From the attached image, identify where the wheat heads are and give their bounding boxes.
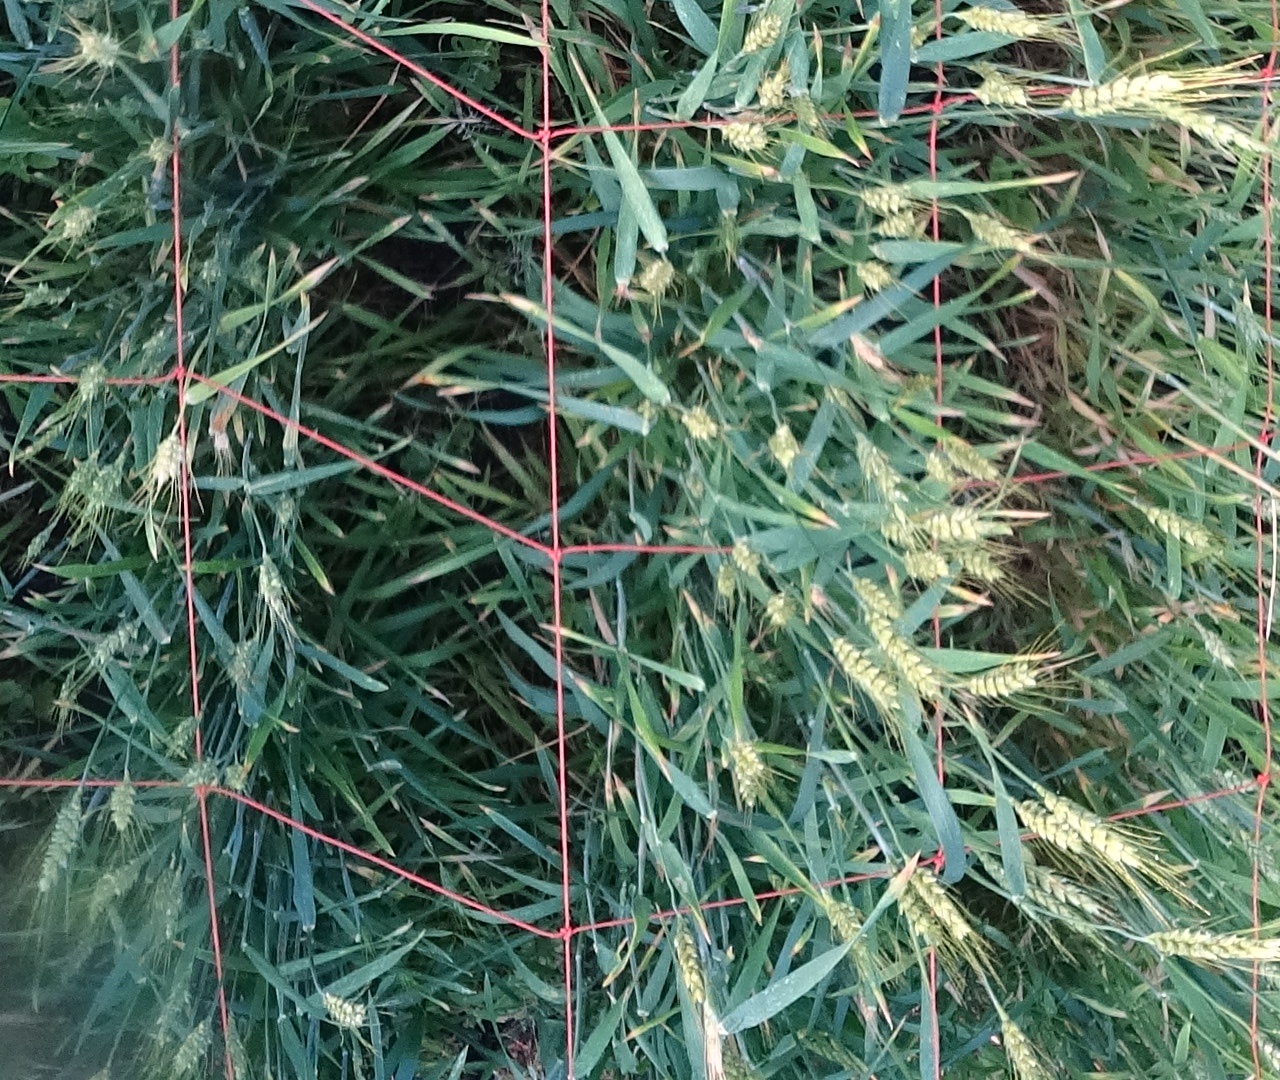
[997,1017,1042,1080]
[978,854,1076,926]
[858,432,902,498]
[679,408,716,439]
[1204,625,1238,672]
[952,543,1013,581]
[1165,102,1256,156]
[720,1043,745,1080]
[222,1013,252,1073]
[907,549,946,577]
[58,926,94,982]
[825,893,865,948]
[860,181,909,212]
[851,574,894,615]
[745,7,781,48]
[966,663,1045,698]
[669,925,706,1009]
[684,459,704,499]
[55,667,78,724]
[906,17,942,49]
[641,254,675,298]
[713,561,733,600]
[961,2,1039,34]
[163,866,186,935]
[768,426,796,466]
[1064,75,1188,118]
[922,510,1001,543]
[1202,203,1238,227]
[826,635,889,706]
[1033,865,1106,918]
[97,463,127,513]
[966,210,1034,255]
[869,611,934,694]
[322,990,361,1029]
[876,214,918,238]
[767,586,791,626]
[66,456,97,495]
[972,83,1028,108]
[148,434,188,490]
[200,256,222,278]
[225,758,249,793]
[762,71,787,107]
[1190,762,1252,791]
[26,420,67,455]
[60,198,100,242]
[273,493,294,521]
[177,713,200,740]
[77,361,99,394]
[882,517,913,545]
[893,891,937,944]
[1042,791,1141,869]
[1137,928,1280,960]
[890,373,933,410]
[737,743,766,804]
[21,291,68,307]
[191,23,213,53]
[73,25,120,57]
[170,1024,209,1072]
[794,96,822,130]
[113,781,137,836]
[152,978,186,1032]
[91,855,144,910]
[241,262,263,284]
[1232,831,1277,888]
[1148,503,1214,552]
[796,1026,851,1067]
[141,328,167,366]
[911,855,964,939]
[942,435,997,485]
[143,128,169,161]
[41,795,83,884]
[89,622,137,661]
[235,638,252,676]
[189,759,220,789]
[258,560,283,601]
[926,457,951,487]
[1014,802,1079,849]
[860,258,892,291]
[719,114,763,158]
[730,537,765,577]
